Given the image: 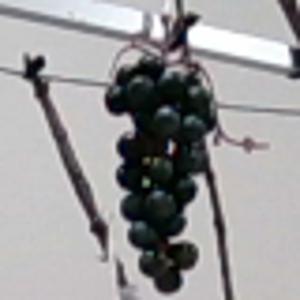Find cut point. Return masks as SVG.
<instances>
[{
    "label": "cut point",
    "instance_id": "1",
    "mask_svg": "<svg viewBox=\"0 0 300 300\" xmlns=\"http://www.w3.org/2000/svg\"><path fill=\"white\" fill-rule=\"evenodd\" d=\"M172 20H173V0H164L163 8L158 16V22L164 33V42L159 55L163 57L165 63L167 58L169 32H170Z\"/></svg>",
    "mask_w": 300,
    "mask_h": 300
}]
</instances>
